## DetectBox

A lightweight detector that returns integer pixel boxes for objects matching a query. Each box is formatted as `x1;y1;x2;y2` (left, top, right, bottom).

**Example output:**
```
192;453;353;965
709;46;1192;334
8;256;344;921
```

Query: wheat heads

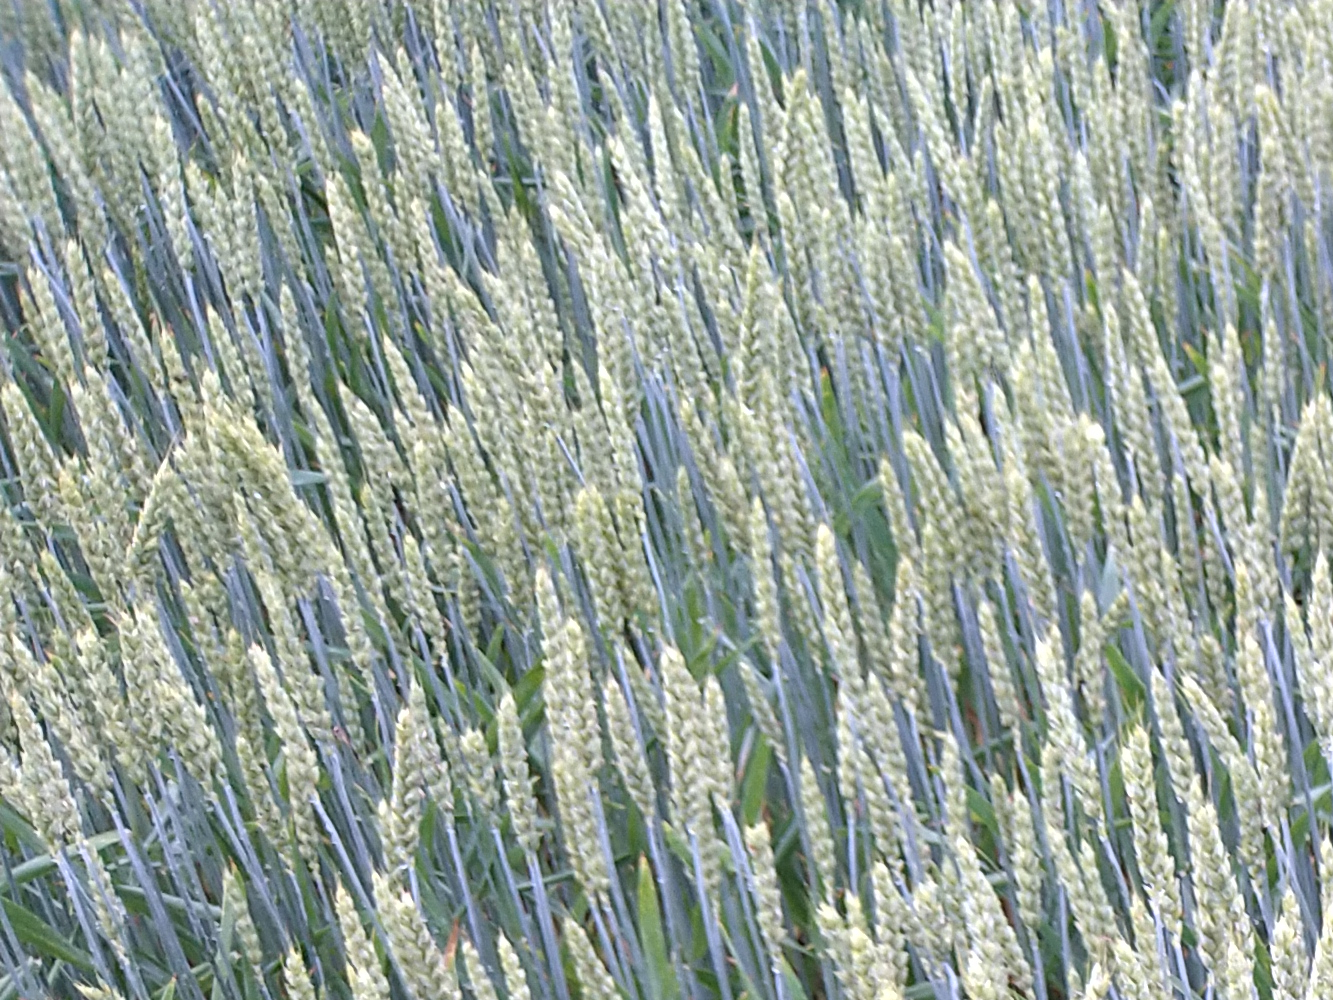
755;246;778;370
693;209;707;248
1282;69;1297;128
1138;199;1154;289
340;0;381;55
572;411;609;492
790;435;814;526
1318;835;1331;909
901;434;963;562
1002;81;1024;138
1118;0;1139;50
457;552;482;643
661;291;709;405
579;133;605;201
55;0;89;38
1226;948;1270;1000
1001;6;1029;119
677;686;719;903
684;86;705;134
980;0;1012;82
404;537;447;654
962;417;1009;534
564;622;601;768
71;386;124;499
577;493;623;638
563;921;634;1000
684;145;748;260
257;178;305;277
358;0;399;64
90;37;120;91
27;0;66;60
1211;370;1244;476
465;289;522;382
661;88;684;171
274;691;308;764
553;0;564;26
990;775;1016;852
745;824;784;963
542;58;571;153
1067;0;1092;110
869;0;886;36
1285;598;1320;723
94;87;126;149
123;463;173;564
618;261;660;369
197;97;234;187
944;423;1001;573
77;634;146;781
1209;0;1241;86
1223;319;1245;416
484;274;514;347
1029;7;1055;74
303;0;349;61
71;33;95;178
327;550;373;668
600;261;641;429
439;105;481;217
1093;103;1120;211
1276;0;1290;65
1204;638;1235;717
66;243;107;364
233;304;274;406
203;576;232;639
875;111;916;202
797;0;812;72
64;0;106;41
1097;0;1136;51
988;204;1025;341
174;482;230;559
1;388;51;522
854;210;867;263
616;498;659;615
210;182;234;231
890;562;921;692
1236;653;1252;704
910;0;935;83
1012;793;1041;929
285;0;329;68
717;304;736;355
1080;843;1120;944
471;45;496;160
137;608;206;727
707;680;735;800
1056;430;1090;542
787;139;817;218
519;64;542;116
434;104;453;196
333;886;395;1000
1152;669;1194;799
207;308;255;414
269;621;332;737
842;13;864;78
1253;364;1269;424
326;0;368;70
1307;451;1333;556
1242;636;1273;711
890;240;927;342
782;555;823;665
386;60;410;70
800;757;836;899
6;103;66;253
604;680;655;812
1248;416;1269;491
1203;510;1230;611
1163;555;1196;669
569;761;611;885
861;341;886;420
1183;2;1200;63
1023;67;1049;143
1046;831;1102;961
236;0;280;75
608;141;668;258
947;289;979;414
734;245;760;391
413;203;446;355
110;0;166;65
1280;421;1313;550
1315;92;1332;156
777;195;812;331
222;875;264;976
529;418;564;521
1038;741;1061;839
338;510;386;617
1173;475;1201;598
1206;331;1223;371
1110;107;1136;213
989;381;1011;462
500;245;528;300
228;631;264;763
854;563;892;673
2;582;31;669
1036;644;1067;731
1209;111;1233;224
556;114;577;180
1255;96;1280;143
1310;555;1333;625
375;889;466;1000
30;269;76;379
387;437;415;511
684;292;723;382
413;446;456;583
1287;336;1301;382
247;498;304;589
229;491;273;576
975;76;995;192
998;152;1042;265
769;74;807;187
1029;278;1072;415
937;0;949;49
336;665;365;750
1197;807;1231;981
1307;604;1333;735
1222;850;1254;940
96;92;144;207
62;477;123;608
860;20;884;111
556;175;595;249
161;332;205;440
817;305;845;399
478;174;512;243
4;0;55;75
236;108;265;160
1319;400;1333;535
510;204;531;250
293;83;334;173
1131;500;1162;586
904;70;958;192
46;88;68;141
774;301;794;410
1262;0;1281;53
38;554;103;641
1116;31;1123;135
847;896;879;1000
679;404;721;516
945;248;1009;370
239;434;331;562
523;246;563;361
1058;26;1072;76
525;371;564;424
242;35;270;109
798;119;836;209
839;258;874;339
434;1;459;84
498;695;537;846
381;336;446;463
811;99;832;165
1271;895;1312;1000
0;745;43;825
1068;175;1079;237
1071;589;1131;681
837;668;857;804
481;347;526;448
1131;732;1176;913
178;581;229;693
914;147;934;247
361;487;404;597
96;161;150;246
1128;370;1164;505
391;714;423;857
397;49;434;143
1123;273;1161;363
233;163;265;290
607;0;639;69
860;230;899;369
579;261;606;348
638;0;665;83
805;207;834;316
1316;13;1333;97
1275;162;1294;223
1236;4;1257;104
1306;221;1333;344
503;67;537;155
188;163;205;207
373;48;408;108
674;2;702;95
438;719;467;797
677;467;703;564
885;172;906;244
774;0;796;36
821;2;849;96
866;674;911;802
1152;364;1208;493
1094;53;1116;124
257;95;291;166
174;449;238;550
249;648;281;716
1111;944;1176;1000
10;635;42;702
164;489;207;580
554;766;582;882
1231;758;1265;873
495;0;521;60
9;381;66;497
1116;744;1133;804
790;312;817;398
662;203;692;288
1268;736;1290;794
96;0;117;43
857;99;871;141
117;28;140;100
662;658;697;826
235;738;295;866
816;906;855;993
234;457;303;567
287;756;323;865
924;527;964;666
502;457;539;534
1248;1;1270;76
186;0;234;91
1147;876;1183;938
497;242;525;308
0;670;18;700
1248;488;1276;619
143;1;186;68
878;459;919;566
0;26;33;102
1211;461;1249;551
339;386;393;505
0;697;14;738
946;0;970;119
941;734;969;838
874;876;908;994
42;635;106;736
380;84;428;197
1093;426;1132;559
550;206;594;266
1290;7;1307;52
13;561;53;660
313;396;350;484
1158;226;1176;342
842;92;885;220
746;37;783;147
1188;72;1202;159
31;674;112;785
621;648;668;743
1049;81;1070;148
282;950;345;1000
409;682;451;806
8;694;83;843
877;51;906;132
583;0;619;63
0;104;34;209
387;0;406;38
351;132;411;268
1131;901;1181;1000
598;368;643;507
1269;95;1319;210
27;69;49;121
256;0;298;71
93;521;144;605
1252;140;1277;269
1044;710;1104;819
202;366;236;474
338;190;404;330
131;75;157;145
749;499;781;648
691;245;722;330
766;386;803;529
43;554;92;632
147;684;217;788
901;195;917;248
1096;207;1118;302
1235;562;1255;644
1182;680;1242;767
447;434;489;529
30;113;110;225
456;1;473;61
199;194;245;294
892;0;917;67
446;409;499;540
1182;150;1215;245
739;105;767;229
461;944;519;1000
1078;593;1106;715
877;877;947;960
497;935;549;1000
1126;39;1150;117
1104;308;1132;444
18;290;56;369
827;182;853;255
206;0;260;119
825;207;845;333
326;183;368;316
738;409;789;544
84;369;153;497
1262;299;1283;398
89;482;129;546
462;733;499;815
1051;625;1072;714
1252;702;1276;792
1008;477;1056;618
594;248;611;384
0;183;32;235
575;364;610;446
855;746;903;872
496;502;533;615
393;410;417;474
979;604;1021;732
1095;202;1111;298
1129;106;1145;191
536;569;571;752
954;843;1039;1000
1154;140;1169;217
622;217;654;306
102;271;163;387
469;0;502;75
601;71;643;172
719;288;738;333
1307;37;1324;105
155;121;194;266
280;284;311;400
924;2;944;101
924;441;974;550
739;664;787;757
1203;220;1240;331
1255;738;1280;755
721;154;737;218
118;616;158;760
785;389;817;477
1022;138;1076;278
1169;99;1181;180
0;507;36;565
814;525;856;675
965;0;985;97
417;0;435;30
316;440;358;526
549;18;582;112
648;98;678;217
460;365;516;481
1011;350;1061;482
207;0;251;100
445;270;474;348
1299;99;1309;138
542;108;556;176
1253;7;1275;87
160;0;213;86
1187;776;1204;903
1077;158;1096;253
83;843;127;952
